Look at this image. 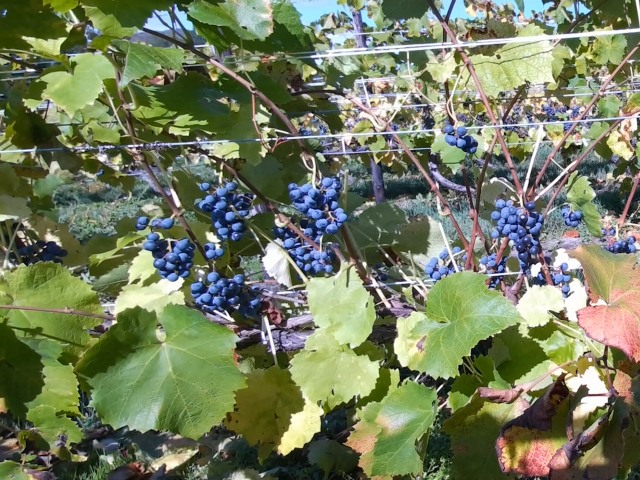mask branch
Here are the masks:
<instances>
[{
    "instance_id": "obj_15",
    "label": "branch",
    "mask_w": 640,
    "mask_h": 480,
    "mask_svg": "<svg viewBox=\"0 0 640 480\" xmlns=\"http://www.w3.org/2000/svg\"><path fill=\"white\" fill-rule=\"evenodd\" d=\"M508 243H509V239L507 237H503L498 249L497 257L495 259L496 264H499L501 262V259L503 257V251L506 249Z\"/></svg>"
},
{
    "instance_id": "obj_10",
    "label": "branch",
    "mask_w": 640,
    "mask_h": 480,
    "mask_svg": "<svg viewBox=\"0 0 640 480\" xmlns=\"http://www.w3.org/2000/svg\"><path fill=\"white\" fill-rule=\"evenodd\" d=\"M456 3L457 0H452L451 1V5L450 8L448 9V12L446 14V16L443 18L441 16V14L438 11V8L436 7L435 3L433 1L429 2V6L431 7L434 15L436 16V18L440 21V23L442 24V41H447V37L451 40V41H455L457 40L454 35L451 33L450 27H449V20L452 17V14L455 10L456 7Z\"/></svg>"
},
{
    "instance_id": "obj_11",
    "label": "branch",
    "mask_w": 640,
    "mask_h": 480,
    "mask_svg": "<svg viewBox=\"0 0 640 480\" xmlns=\"http://www.w3.org/2000/svg\"><path fill=\"white\" fill-rule=\"evenodd\" d=\"M340 231L342 233L343 239H344V243L347 246V251L349 254V262L350 264L354 267L356 273L358 274V276L363 280V284H369L370 280L365 276V274L362 272L359 264L354 260L355 258V254L353 252L352 249V244L349 240V236L347 234L346 228L345 227H341Z\"/></svg>"
},
{
    "instance_id": "obj_17",
    "label": "branch",
    "mask_w": 640,
    "mask_h": 480,
    "mask_svg": "<svg viewBox=\"0 0 640 480\" xmlns=\"http://www.w3.org/2000/svg\"><path fill=\"white\" fill-rule=\"evenodd\" d=\"M523 280H524V276L520 275L519 278H518L517 284H516V286L514 288V291L512 293L513 297H517L518 296V293H519V290H520V288L522 286Z\"/></svg>"
},
{
    "instance_id": "obj_4",
    "label": "branch",
    "mask_w": 640,
    "mask_h": 480,
    "mask_svg": "<svg viewBox=\"0 0 640 480\" xmlns=\"http://www.w3.org/2000/svg\"><path fill=\"white\" fill-rule=\"evenodd\" d=\"M212 161H215L219 164H221L222 166H224L227 171L229 172L230 175H232L233 177H236L237 179L241 180L242 182H244L246 184V186L254 193V195L262 202L264 203L270 211L274 212L276 216H278V218L284 222L285 224H287L288 227L291 228L292 231H294L296 234L299 235V237L303 240L306 241L310 246H312L316 251L320 250V246L318 244H316L310 237L304 235V232L302 230H300L297 226H295L294 223H292L288 218H286L276 207L273 206V204L267 200L266 198H264V196L257 190V188L243 175H241L240 173L234 171L231 167V165L226 162L225 160H223L222 158H219L218 156H212L211 157Z\"/></svg>"
},
{
    "instance_id": "obj_2",
    "label": "branch",
    "mask_w": 640,
    "mask_h": 480,
    "mask_svg": "<svg viewBox=\"0 0 640 480\" xmlns=\"http://www.w3.org/2000/svg\"><path fill=\"white\" fill-rule=\"evenodd\" d=\"M144 32L146 34L152 35L154 37H158L166 42L172 43L174 45H178L194 54H196L198 57H202L203 59H206L207 62H211L215 67L219 68L220 70L226 72L227 75H229L233 80L239 82L240 84H243L245 86L246 89L250 90V93L253 95H258L262 100H264L266 102V104L269 106V108L271 110L274 111V113L281 118V120L286 124L287 128L289 129V131L293 134V135H299V132L297 129H295L291 123V121L283 114L280 112V110L273 104V102L268 98L267 95H265L261 89H259L257 86H255L252 83H248V81L242 77H240L233 69H230L226 66H223L220 62L216 61L214 58H211L209 54H205L201 51H199L198 49H196L193 46H190L180 40L168 37L167 35H164L160 32H157L155 30H151L148 28L144 29Z\"/></svg>"
},
{
    "instance_id": "obj_5",
    "label": "branch",
    "mask_w": 640,
    "mask_h": 480,
    "mask_svg": "<svg viewBox=\"0 0 640 480\" xmlns=\"http://www.w3.org/2000/svg\"><path fill=\"white\" fill-rule=\"evenodd\" d=\"M622 122L623 120L613 121L605 130H603L596 137V139L593 140V142L583 152L580 153L578 160L572 164V166L568 169V171L564 174V176L557 183L556 187L553 189V192L544 207V211H543L544 216L548 215L551 205L555 201L556 196L558 195V192L562 188L563 184L569 179V177L576 170V168L583 162L585 156H587L593 150V148L596 147L597 144L601 142L603 137L608 135L617 125L621 124Z\"/></svg>"
},
{
    "instance_id": "obj_13",
    "label": "branch",
    "mask_w": 640,
    "mask_h": 480,
    "mask_svg": "<svg viewBox=\"0 0 640 480\" xmlns=\"http://www.w3.org/2000/svg\"><path fill=\"white\" fill-rule=\"evenodd\" d=\"M525 87H526V84H525V83H522V84L518 87V89L516 90L515 94L512 96V98H511V100H510V102H509V105H508V107H507L506 111L504 112L503 116L501 117V119H500V121H499V124H504V123H505V121L507 120V118L509 117V115H510L511 111H512V110H513V108H514V105H515L516 100L518 99V97L520 96V94L522 93V91L525 89Z\"/></svg>"
},
{
    "instance_id": "obj_18",
    "label": "branch",
    "mask_w": 640,
    "mask_h": 480,
    "mask_svg": "<svg viewBox=\"0 0 640 480\" xmlns=\"http://www.w3.org/2000/svg\"><path fill=\"white\" fill-rule=\"evenodd\" d=\"M161 134H162L163 136H165V137H167V138L171 139V140H172V141H174V142H178V141H179V138H178L177 136H175L174 134H171V133H170V132H168V131L162 130V131H161Z\"/></svg>"
},
{
    "instance_id": "obj_16",
    "label": "branch",
    "mask_w": 640,
    "mask_h": 480,
    "mask_svg": "<svg viewBox=\"0 0 640 480\" xmlns=\"http://www.w3.org/2000/svg\"><path fill=\"white\" fill-rule=\"evenodd\" d=\"M297 143L304 150L305 158H306V165L308 167H311L312 166L311 151L309 150L308 146L303 142V140H297Z\"/></svg>"
},
{
    "instance_id": "obj_8",
    "label": "branch",
    "mask_w": 640,
    "mask_h": 480,
    "mask_svg": "<svg viewBox=\"0 0 640 480\" xmlns=\"http://www.w3.org/2000/svg\"><path fill=\"white\" fill-rule=\"evenodd\" d=\"M640 49L639 45H635L630 52L627 54V56L621 60L612 70V72L609 74V76L606 78V80L600 84V86L598 87V89L596 90L595 95L593 96V98L591 99V101L587 104V106L580 112V114L578 115V118H584V116L591 110V108L595 105V103L597 102V100L599 99L601 92L603 91V89L611 82V80L616 76V74L618 73V71L620 70L621 67H623L625 64H627L631 58L634 56V54Z\"/></svg>"
},
{
    "instance_id": "obj_7",
    "label": "branch",
    "mask_w": 640,
    "mask_h": 480,
    "mask_svg": "<svg viewBox=\"0 0 640 480\" xmlns=\"http://www.w3.org/2000/svg\"><path fill=\"white\" fill-rule=\"evenodd\" d=\"M115 75H116V77L114 78L115 90L119 100L121 101V110L125 114V117L127 120L128 136L132 144H138L139 140L137 139L135 129L133 127V118L131 117V107L125 96V92L121 91V88H120L119 82L121 81V73L119 71H116Z\"/></svg>"
},
{
    "instance_id": "obj_6",
    "label": "branch",
    "mask_w": 640,
    "mask_h": 480,
    "mask_svg": "<svg viewBox=\"0 0 640 480\" xmlns=\"http://www.w3.org/2000/svg\"><path fill=\"white\" fill-rule=\"evenodd\" d=\"M315 93H319V94H325V95H335V96H340V97H344L346 98L350 103H352L353 105H355L356 107H358L361 111H364L370 118H372L375 122H377L379 125L384 126L385 130H392V127L386 122L381 120L379 117H377L370 109H368L366 106H363L360 102H358L357 100H355L354 98H352L348 93L343 92V91H337V90H327V89H321V88H313V89H305V90H301V91H295V92H291L290 96L291 97H297V96H303V95H307V94H315Z\"/></svg>"
},
{
    "instance_id": "obj_9",
    "label": "branch",
    "mask_w": 640,
    "mask_h": 480,
    "mask_svg": "<svg viewBox=\"0 0 640 480\" xmlns=\"http://www.w3.org/2000/svg\"><path fill=\"white\" fill-rule=\"evenodd\" d=\"M457 52L462 56L463 60L466 63L468 71H469L471 77L473 78V83H474L477 91L479 92V95H480L481 99L483 100L486 109L488 110V113L490 115V118H491L493 124H498V119L496 118L494 110L491 107L490 102H489V100H488V98H487L482 86L479 83L478 75L476 74V72H475V70L473 68L472 62L470 61L468 55L466 54V52L462 48L461 49H457Z\"/></svg>"
},
{
    "instance_id": "obj_3",
    "label": "branch",
    "mask_w": 640,
    "mask_h": 480,
    "mask_svg": "<svg viewBox=\"0 0 640 480\" xmlns=\"http://www.w3.org/2000/svg\"><path fill=\"white\" fill-rule=\"evenodd\" d=\"M134 152H135L136 156L138 157L139 163L142 165V168H143L144 172L148 175L149 179L152 181L155 189L169 203V205L171 206L173 212L175 213V216H176L177 220L180 221V224L184 227V229L186 230L187 234L189 235L191 241L193 242L194 247L196 248L198 253L201 256H203V254H204L203 248L200 246V244H199L198 240L196 239L193 231L191 230V227L187 224V221L185 220L184 216L180 213L178 207L176 206V203L172 200V198L168 194H166V191L163 189L162 183L158 180V178L153 173L151 167L149 166V164L146 161L147 156L145 154H143V149H134ZM203 258H204L205 262L207 264H209V266L211 268H214L212 266L211 262L205 256H203Z\"/></svg>"
},
{
    "instance_id": "obj_14",
    "label": "branch",
    "mask_w": 640,
    "mask_h": 480,
    "mask_svg": "<svg viewBox=\"0 0 640 480\" xmlns=\"http://www.w3.org/2000/svg\"><path fill=\"white\" fill-rule=\"evenodd\" d=\"M544 256H545V255H544V253H543V252H540V253H539V257H540V260H541V263H542V267H543V271H544V276H545V278H546V280H547L548 284H549V285H553V284H554V281L552 280V278H551V276H550V274H549V268H548V265H547V264L545 263V261H544Z\"/></svg>"
},
{
    "instance_id": "obj_1",
    "label": "branch",
    "mask_w": 640,
    "mask_h": 480,
    "mask_svg": "<svg viewBox=\"0 0 640 480\" xmlns=\"http://www.w3.org/2000/svg\"><path fill=\"white\" fill-rule=\"evenodd\" d=\"M577 127H578V123L577 124H573L565 132V134L561 138V141L559 142V144L554 148V150L552 151L550 156L543 163L539 173L536 175L532 185L530 186V188L528 189L526 194H525V189L521 188V186H520V183H519L515 168L513 167V164H512L510 151H509V149H508V147L506 145V142L502 138L501 131L498 130V129L494 130L492 139L490 140V143H489L488 148H487L486 155L484 157V162L482 164V170H480L479 174H478V178H477L476 185H475V200H474V197H473V195H472V193L470 191V188H469L468 175H467V170H466V163L464 161L460 162L462 178H463V186H464L465 193H466V195L468 197L467 202H468V209H469V218L471 220H473L470 241H468L466 239V237L464 236L463 232L461 231L460 227L458 226L455 218L453 217V214L451 213V211H450V209H449V207H448V205L446 203L445 197L442 195L440 190L437 188V185L429 177L427 171L425 169H423V167L417 161L416 156L413 154L411 147L408 144H406L405 142H403L397 135H392V138H393L394 141H396L397 144H399L403 149L406 150V152H407L409 158L411 159L412 163L415 165L417 170L423 175L424 179L432 187L433 192L436 194V196L440 200L442 208L444 209V212L448 216V220L451 222V225L453 226L455 232L457 233L458 237L460 238L461 242L464 245L465 253H466V262H465V264L463 266V270L467 271L469 269V266H470L471 270L475 269V264H474V260H473V257H472V252H473V248H474L476 233H478V235L480 236V238L482 240L485 255L486 256L490 255L487 238H486L484 232L482 231V228L480 227L479 222H478V214H479L481 183H482V180L486 178L487 166L489 164V160H490V157H491L492 150H493V147L495 145V142L497 140L499 141V143L501 145V148L503 149V151L505 153L506 163H507L508 169L510 170L511 177H512V180H513L514 185H515V189L517 190L518 193H521L522 204L526 205L527 202L529 201L532 193L536 189L538 183L540 182V179L544 175L547 167L553 161V159L558 154V152L563 148V146L565 145V142L567 141V139L570 137L571 133Z\"/></svg>"
},
{
    "instance_id": "obj_19",
    "label": "branch",
    "mask_w": 640,
    "mask_h": 480,
    "mask_svg": "<svg viewBox=\"0 0 640 480\" xmlns=\"http://www.w3.org/2000/svg\"><path fill=\"white\" fill-rule=\"evenodd\" d=\"M190 148L194 151H197L198 153L202 154V155H207L208 151L205 149H202L201 147L197 146V145H190Z\"/></svg>"
},
{
    "instance_id": "obj_12",
    "label": "branch",
    "mask_w": 640,
    "mask_h": 480,
    "mask_svg": "<svg viewBox=\"0 0 640 480\" xmlns=\"http://www.w3.org/2000/svg\"><path fill=\"white\" fill-rule=\"evenodd\" d=\"M640 181V175H636L634 182L632 184L631 190L629 191L627 198L625 199L624 205H623V212H622V217L620 219V223H619V227L623 228L627 219V214H628V208H629V204L630 201L632 200V197L634 196L636 189L638 187Z\"/></svg>"
}]
</instances>
